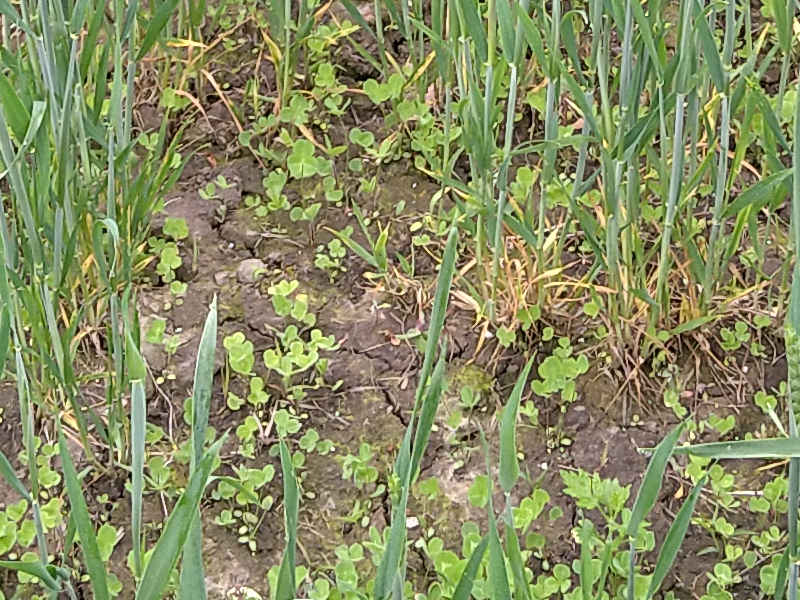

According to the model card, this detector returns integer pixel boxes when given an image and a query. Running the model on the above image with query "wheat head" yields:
[785,328,800,427]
